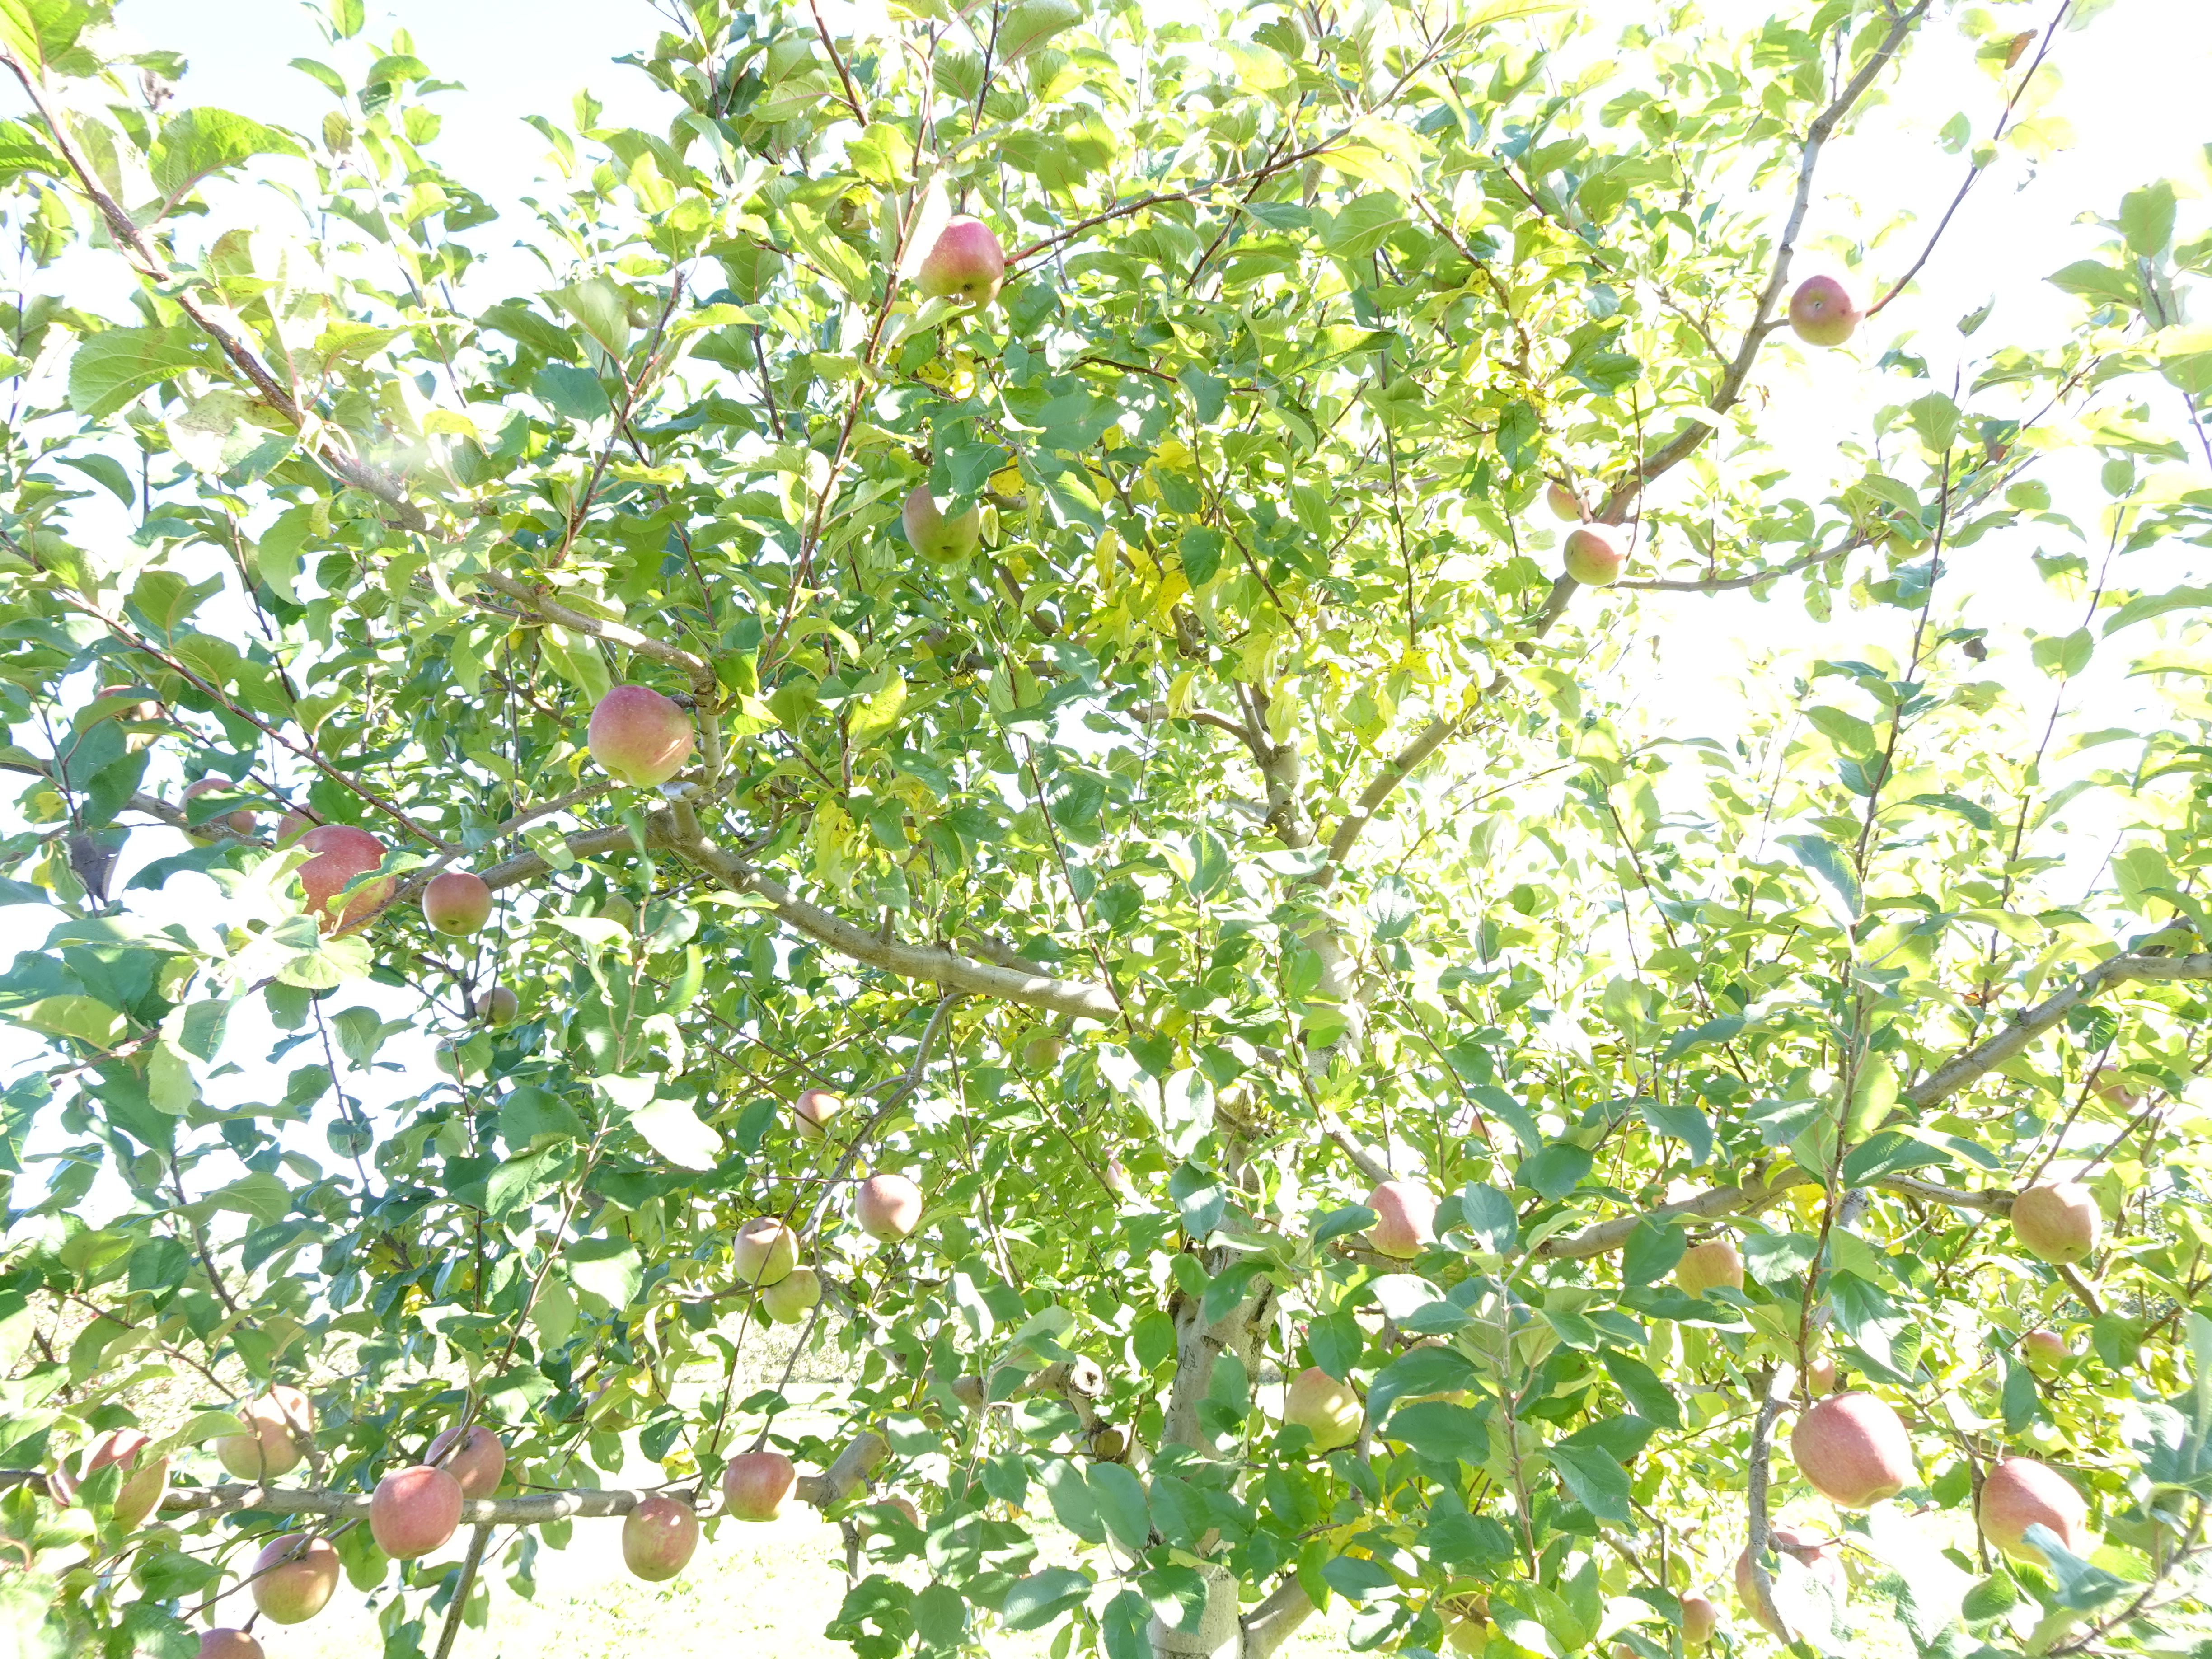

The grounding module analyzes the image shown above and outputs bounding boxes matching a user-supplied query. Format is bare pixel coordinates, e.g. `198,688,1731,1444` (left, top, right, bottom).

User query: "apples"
587,685,693,788
1884,510,1935,559
287,825,397,942
51,1427,170,1528
1103,1149,1123,1178
423,1424,506,1500
2021,1329,2073,1378
596,893,636,933
1398,1338,1464,1404
1796,1355,1835,1395
1613,1643,1640,1659
911,1277,945,1312
95,685,163,751
1978,1456,2086,1568
902,482,980,563
622,1496,699,1582
588,1375,635,1432
1737,1527,1848,1635
855,1174,922,1242
194,1628,264,1659
1106,1165,1118,1189
251,1533,340,1624
178,778,257,848
2010,1182,2103,1265
1678,1588,1717,1643
1363,1180,1437,1258
422,872,494,936
276,803,325,839
1563,523,1626,587
1284,1366,1364,1452
914,214,1005,317
1789,275,1866,347
722,1452,797,1522
2090,1065,2139,1112
733,1217,799,1286
369,1465,463,1559
1675,1240,1744,1300
726,787,763,811
859,1499,918,1549
762,1265,821,1324
794,1088,842,1143
1547,481,1581,522
475,987,518,1027
1471,1113,1491,1138
216,1385,314,1480
1024,1038,1061,1071
1791,1391,1912,1509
